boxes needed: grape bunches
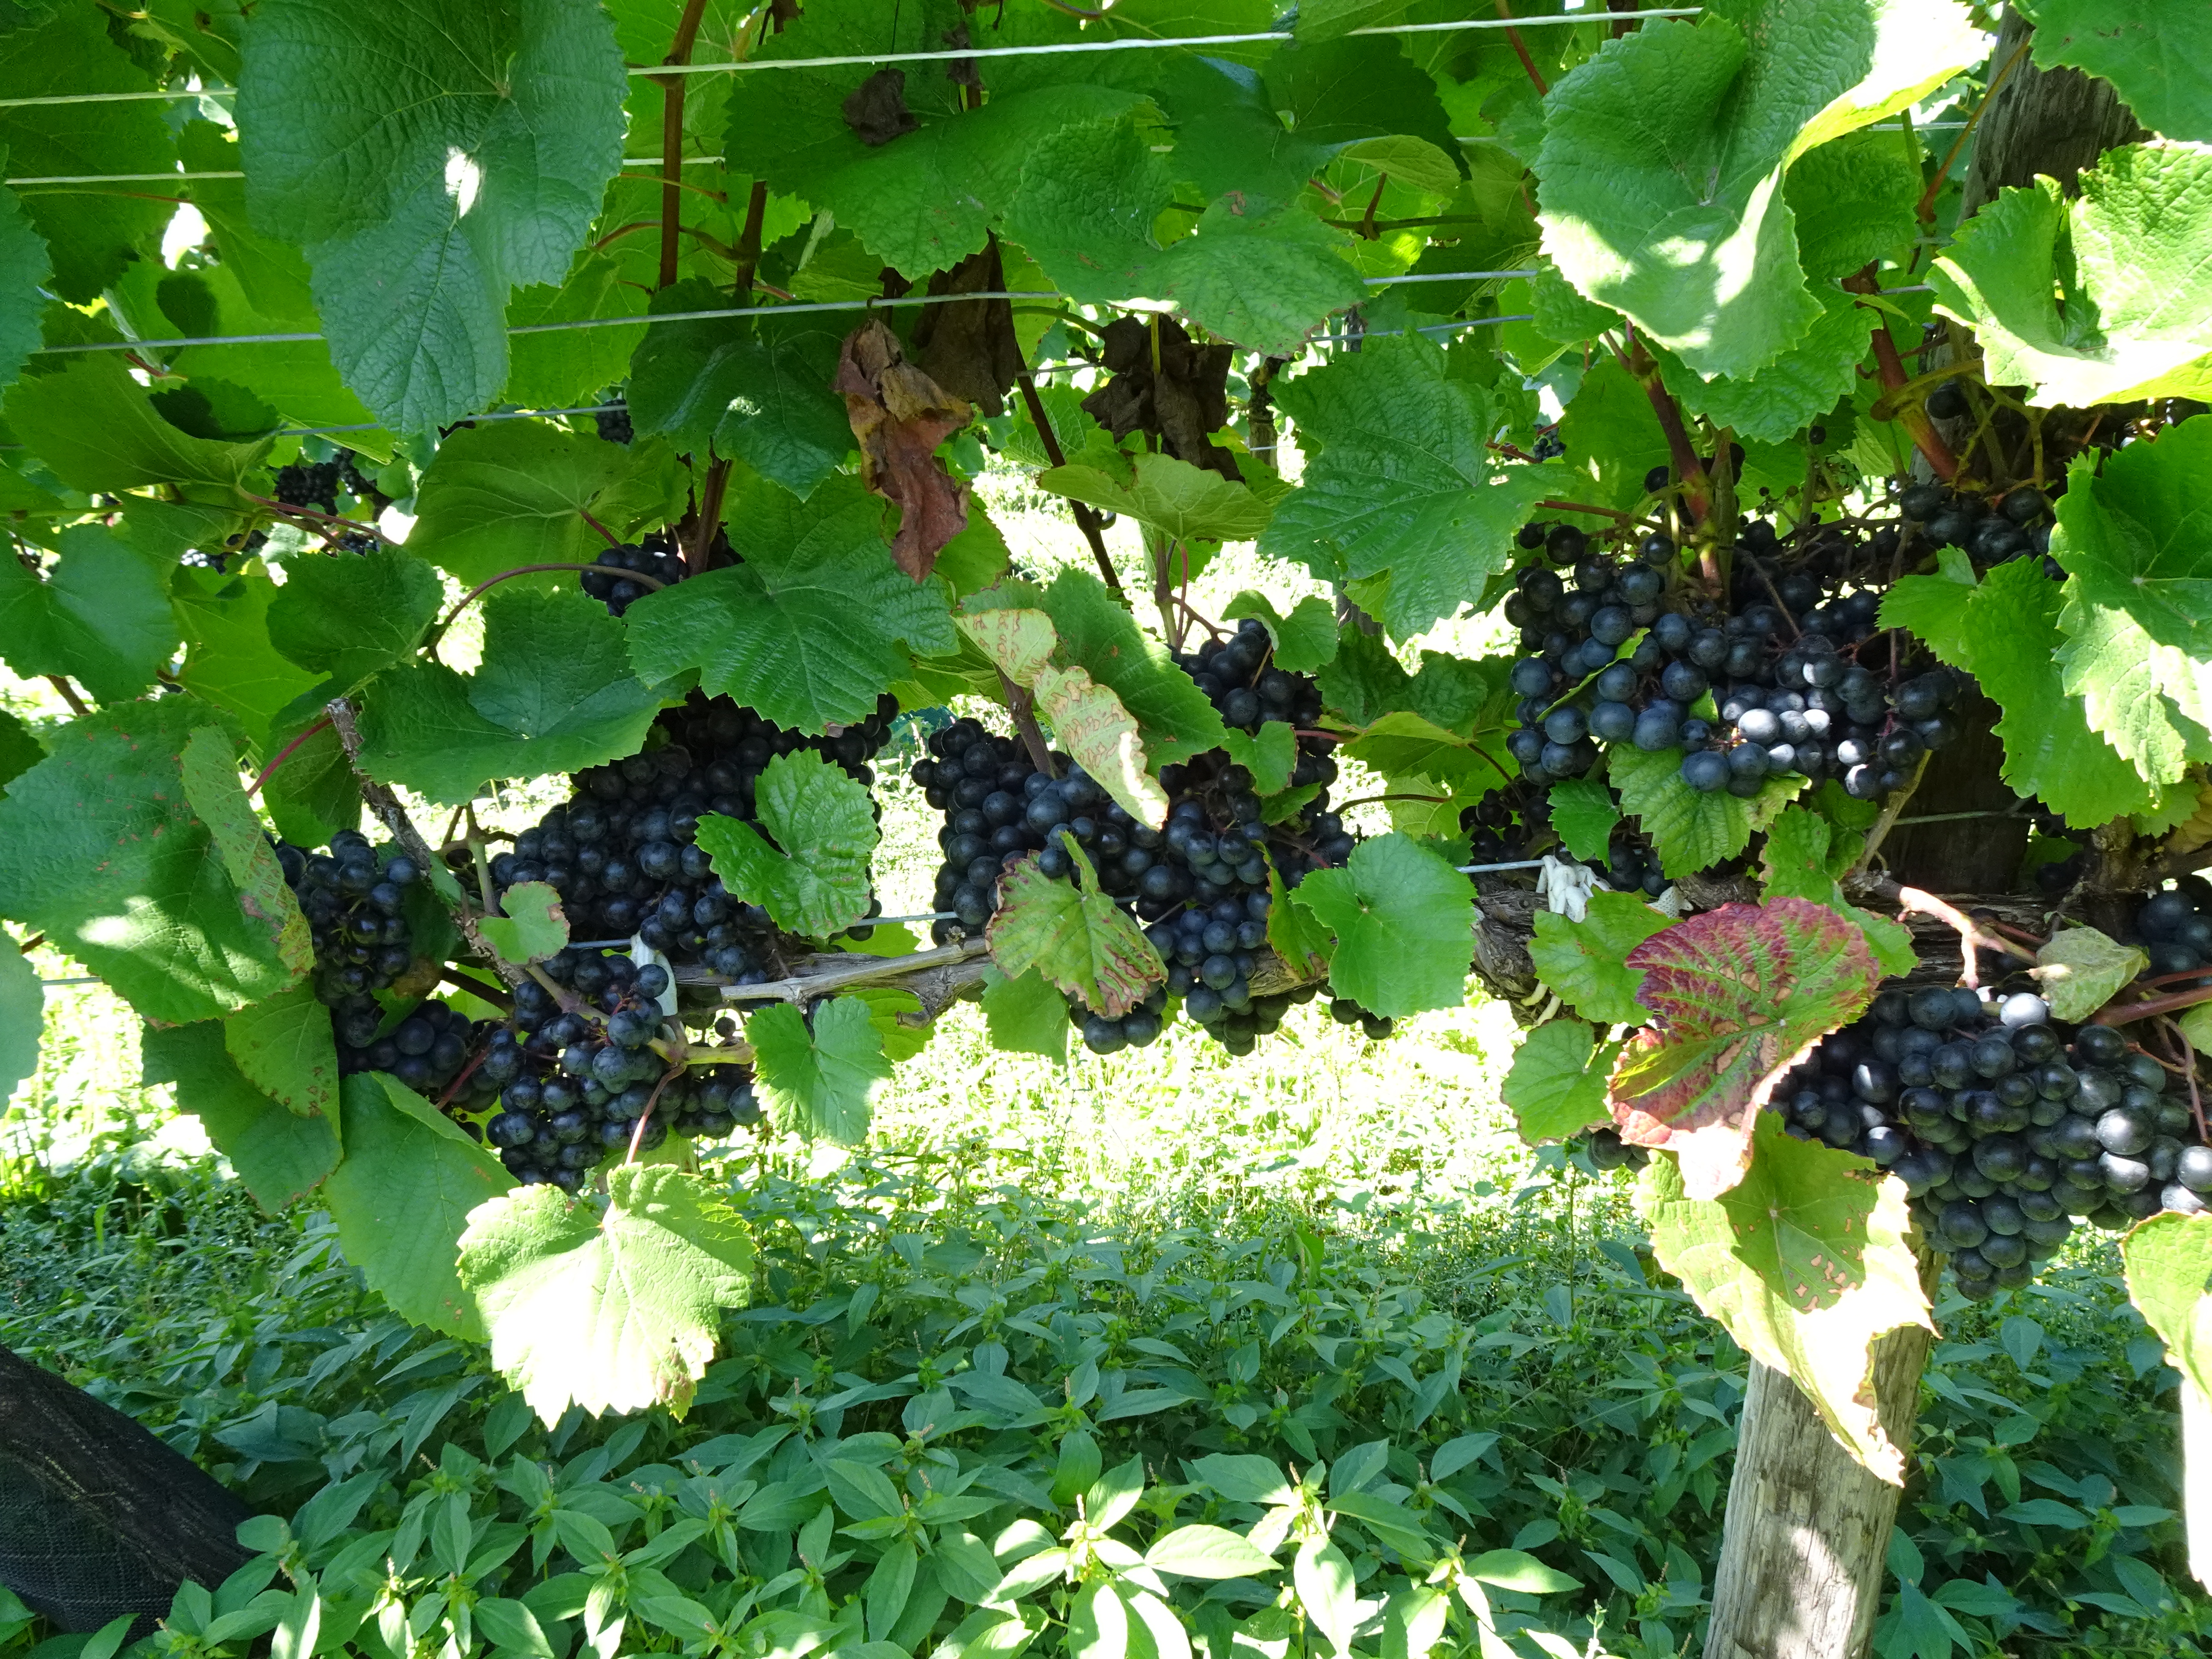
[330,998,473,1106]
[445,848,513,918]
[1505,521,1674,783]
[262,827,311,890]
[569,722,693,817]
[1691,518,1858,615]
[1025,756,1194,1054]
[1802,589,1882,650]
[1837,661,1961,800]
[293,830,420,1047]
[412,1019,506,1144]
[1964,906,2043,979]
[1853,984,2079,1301]
[1825,524,1904,592]
[1644,440,1745,527]
[1586,1024,1657,1173]
[1163,766,1274,1022]
[1928,379,2121,500]
[1200,984,1315,1056]
[674,1016,765,1140]
[2027,1024,2212,1231]
[483,1028,607,1195]
[1459,773,1555,865]
[2036,814,2085,892]
[2109,396,2212,450]
[801,993,837,1045]
[580,543,691,618]
[2137,877,2212,993]
[1315,977,1392,1040]
[652,685,899,941]
[1675,685,1842,801]
[1761,1005,1890,1181]
[1722,604,1879,703]
[1580,567,1729,752]
[687,518,746,573]
[910,718,1072,947]
[493,791,663,953]
[639,796,801,1012]
[661,940,721,1029]
[1900,459,2073,583]
[1551,838,1674,892]
[1162,618,1356,889]
[513,948,669,1152]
